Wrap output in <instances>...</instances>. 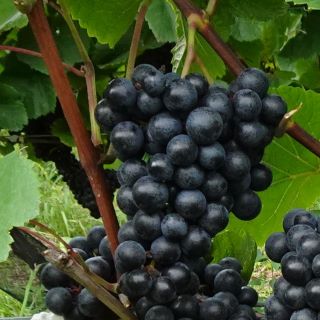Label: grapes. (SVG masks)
Masks as SVG:
<instances>
[{"label":"grapes","mask_w":320,"mask_h":320,"mask_svg":"<svg viewBox=\"0 0 320 320\" xmlns=\"http://www.w3.org/2000/svg\"><path fill=\"white\" fill-rule=\"evenodd\" d=\"M283 228L265 241L267 256L281 263L283 275L265 302L267 320H320V216L292 210Z\"/></svg>","instance_id":"grapes-2"},{"label":"grapes","mask_w":320,"mask_h":320,"mask_svg":"<svg viewBox=\"0 0 320 320\" xmlns=\"http://www.w3.org/2000/svg\"><path fill=\"white\" fill-rule=\"evenodd\" d=\"M228 88L208 85L200 73L163 74L139 64L132 77L108 81L94 118L110 133L122 164L118 207L128 215L111 253L105 228L68 245L101 279L118 283L138 320H255L257 292L244 286L233 257L212 263L211 240L229 223L256 218L272 183L259 164L287 113V102L267 95L269 80L256 68Z\"/></svg>","instance_id":"grapes-1"},{"label":"grapes","mask_w":320,"mask_h":320,"mask_svg":"<svg viewBox=\"0 0 320 320\" xmlns=\"http://www.w3.org/2000/svg\"><path fill=\"white\" fill-rule=\"evenodd\" d=\"M105 288V287H104ZM106 289V288H105ZM110 294H112L120 303H121V301H120V299H119V296H118V294H115V293H112L111 291H109L108 289H106ZM122 304V303H121ZM123 305V304H122Z\"/></svg>","instance_id":"grapes-4"},{"label":"grapes","mask_w":320,"mask_h":320,"mask_svg":"<svg viewBox=\"0 0 320 320\" xmlns=\"http://www.w3.org/2000/svg\"><path fill=\"white\" fill-rule=\"evenodd\" d=\"M46 307L64 320H122L83 284L48 262L41 273Z\"/></svg>","instance_id":"grapes-3"}]
</instances>
